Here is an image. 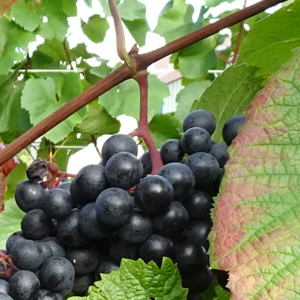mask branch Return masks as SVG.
Segmentation results:
<instances>
[{
    "mask_svg": "<svg viewBox=\"0 0 300 300\" xmlns=\"http://www.w3.org/2000/svg\"><path fill=\"white\" fill-rule=\"evenodd\" d=\"M285 2L286 0H260L241 11L225 15L217 21L202 26L187 35L173 40L159 48L148 51L145 54H138L136 51H131L126 56L125 63H123L115 71L100 79L70 102L63 104L55 112L51 113L48 117L36 125H33L29 130L24 132L22 135H19L14 141L1 150L0 166H4L10 158L15 157L21 150L51 131L66 118L87 107L92 102L96 101L101 95L111 91L119 83L127 79H134L137 74L146 70L153 63L158 62L175 52L185 49L188 46H192L211 35L227 29L228 27H232L244 20L253 18L265 12L268 8Z\"/></svg>",
    "mask_w": 300,
    "mask_h": 300,
    "instance_id": "obj_1",
    "label": "branch"
}]
</instances>
